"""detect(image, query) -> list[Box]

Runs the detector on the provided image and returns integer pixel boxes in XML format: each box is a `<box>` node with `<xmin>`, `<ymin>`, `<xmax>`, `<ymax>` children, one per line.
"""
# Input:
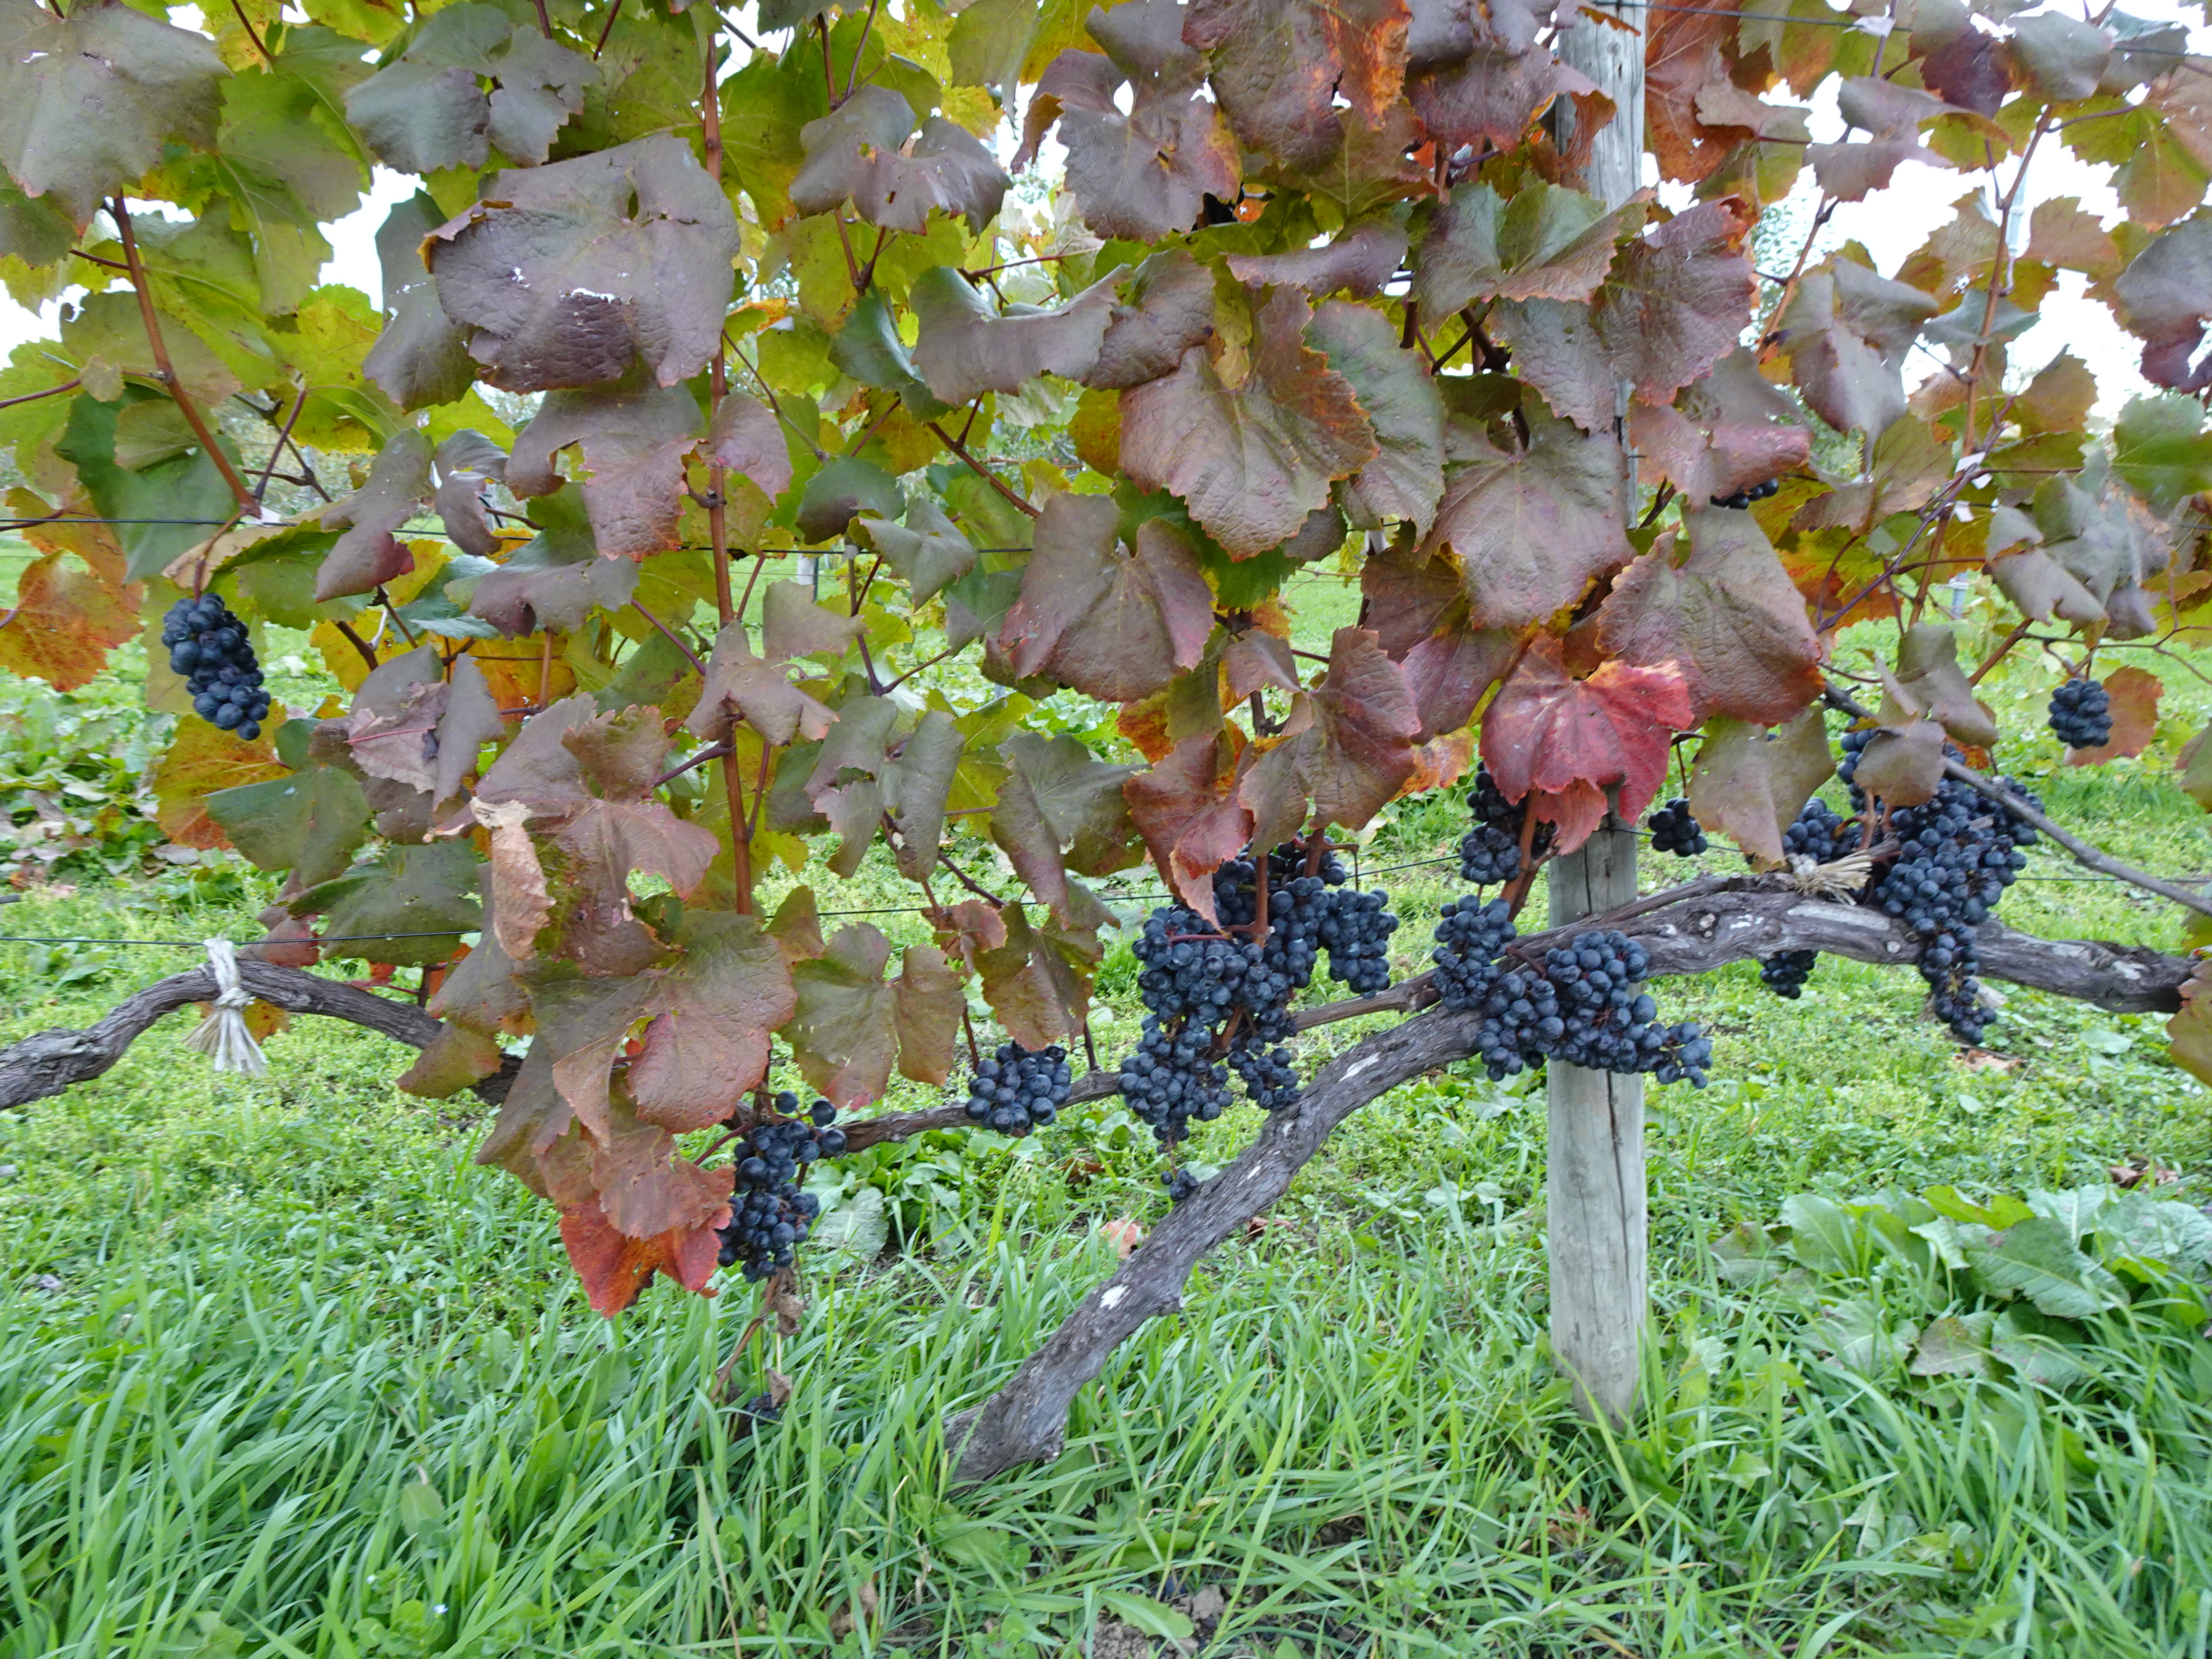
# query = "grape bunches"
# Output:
<box><xmin>1434</xmin><ymin>893</ymin><xmax>1518</xmax><ymax>1010</ymax></box>
<box><xmin>1119</xmin><ymin>1041</ymin><xmax>1233</xmax><ymax>1203</ymax></box>
<box><xmin>1892</xmin><ymin>779</ymin><xmax>1983</xmax><ymax>841</ymax></box>
<box><xmin>713</xmin><ymin>1090</ymin><xmax>846</xmax><ymax>1283</ymax></box>
<box><xmin>1745</xmin><ymin>796</ymin><xmax>1857</xmax><ymax>1000</ymax></box>
<box><xmin>1261</xmin><ymin>875</ymin><xmax>1329</xmax><ymax>989</ymax></box>
<box><xmin>159</xmin><ymin>591</ymin><xmax>271</xmax><ymax>741</ymax></box>
<box><xmin>1543</xmin><ymin>929</ymin><xmax>1649</xmax><ymax>1023</ymax></box>
<box><xmin>964</xmin><ymin>1039</ymin><xmax>1072</xmax><ymax>1137</ymax></box>
<box><xmin>1219</xmin><ymin>944</ymin><xmax>1288</xmax><ymax>1019</ymax></box>
<box><xmin>1277</xmin><ymin>832</ymin><xmax>1345</xmax><ymax>887</ymax></box>
<box><xmin>1318</xmin><ymin>887</ymin><xmax>1398</xmax><ymax>999</ymax></box>
<box><xmin>1456</xmin><ymin>760</ymin><xmax>1559</xmax><ymax>886</ymax></box>
<box><xmin>2047</xmin><ymin>678</ymin><xmax>2112</xmax><ymax>750</ymax></box>
<box><xmin>1837</xmin><ymin>717</ymin><xmax>1966</xmax><ymax>812</ymax></box>
<box><xmin>1563</xmin><ymin>996</ymin><xmax>1713</xmax><ymax>1089</ymax></box>
<box><xmin>1977</xmin><ymin>777</ymin><xmax>2044</xmax><ymax>844</ymax></box>
<box><xmin>1478</xmin><ymin>969</ymin><xmax>1564</xmax><ymax>1082</ymax></box>
<box><xmin>1875</xmin><ymin>817</ymin><xmax>2026</xmax><ymax>1045</ymax></box>
<box><xmin>1213</xmin><ymin>844</ymin><xmax>1282</xmax><ymax>943</ymax></box>
<box><xmin>1132</xmin><ymin>895</ymin><xmax>1248</xmax><ymax>1063</ymax></box>
<box><xmin>1767</xmin><ymin>734</ymin><xmax>1777</xmax><ymax>741</ymax></box>
<box><xmin>1709</xmin><ymin>477</ymin><xmax>1779</xmax><ymax>510</ymax></box>
<box><xmin>1229</xmin><ymin>1007</ymin><xmax>1300</xmax><ymax>1111</ymax></box>
<box><xmin>1648</xmin><ymin>798</ymin><xmax>1708</xmax><ymax>857</ymax></box>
